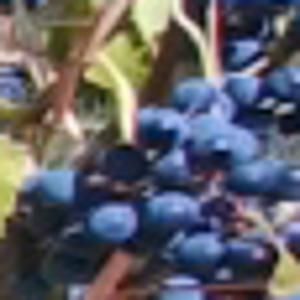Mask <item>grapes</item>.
Segmentation results:
<instances>
[{
    "label": "grapes",
    "mask_w": 300,
    "mask_h": 300,
    "mask_svg": "<svg viewBox=\"0 0 300 300\" xmlns=\"http://www.w3.org/2000/svg\"><path fill=\"white\" fill-rule=\"evenodd\" d=\"M32 94V80L21 68L12 65L0 67V97L10 101H25Z\"/></svg>",
    "instance_id": "2"
},
{
    "label": "grapes",
    "mask_w": 300,
    "mask_h": 300,
    "mask_svg": "<svg viewBox=\"0 0 300 300\" xmlns=\"http://www.w3.org/2000/svg\"><path fill=\"white\" fill-rule=\"evenodd\" d=\"M262 56L257 37H229L223 77L185 76L169 107L138 105V146L102 147L99 175L68 166L30 181L44 206L68 212L45 258L53 286H90L117 245H157L162 300H206L209 283L250 285L272 272L276 246L243 218L271 196L300 200V164L257 157L253 130L289 135L300 125V65L262 77L252 72Z\"/></svg>",
    "instance_id": "1"
}]
</instances>
